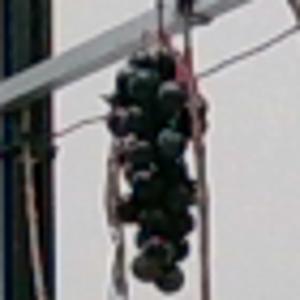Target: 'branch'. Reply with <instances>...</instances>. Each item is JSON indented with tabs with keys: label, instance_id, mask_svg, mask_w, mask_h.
<instances>
[{
	"label": "branch",
	"instance_id": "branch-1",
	"mask_svg": "<svg viewBox=\"0 0 300 300\" xmlns=\"http://www.w3.org/2000/svg\"><path fill=\"white\" fill-rule=\"evenodd\" d=\"M128 138L116 140L109 135V148L106 155V181L102 194L105 221L114 247V261L109 268V291L106 300H130V284L125 276L126 241L125 225L119 223L113 214L117 198L122 195L121 170L113 160L115 149L126 144Z\"/></svg>",
	"mask_w": 300,
	"mask_h": 300
},
{
	"label": "branch",
	"instance_id": "branch-2",
	"mask_svg": "<svg viewBox=\"0 0 300 300\" xmlns=\"http://www.w3.org/2000/svg\"><path fill=\"white\" fill-rule=\"evenodd\" d=\"M205 135L190 140L194 159L196 179L202 186V197L193 205L196 207L199 231L197 251L200 259V300H212L211 296V250H210V215L211 187L208 183V147Z\"/></svg>",
	"mask_w": 300,
	"mask_h": 300
},
{
	"label": "branch",
	"instance_id": "branch-3",
	"mask_svg": "<svg viewBox=\"0 0 300 300\" xmlns=\"http://www.w3.org/2000/svg\"><path fill=\"white\" fill-rule=\"evenodd\" d=\"M117 91L116 88L114 87V89L109 92V94H106V93H99L97 94V98L100 99L103 103H105L107 106H109L110 108V111H112V107L110 105V98L112 96V94Z\"/></svg>",
	"mask_w": 300,
	"mask_h": 300
}]
</instances>
